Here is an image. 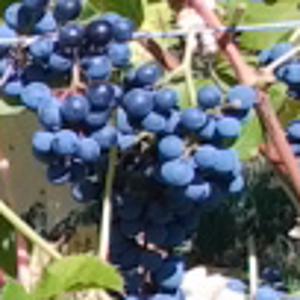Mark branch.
Wrapping results in <instances>:
<instances>
[{
	"label": "branch",
	"instance_id": "2",
	"mask_svg": "<svg viewBox=\"0 0 300 300\" xmlns=\"http://www.w3.org/2000/svg\"><path fill=\"white\" fill-rule=\"evenodd\" d=\"M189 5L203 17L207 28L222 24V20L215 14L207 0H189Z\"/></svg>",
	"mask_w": 300,
	"mask_h": 300
},
{
	"label": "branch",
	"instance_id": "1",
	"mask_svg": "<svg viewBox=\"0 0 300 300\" xmlns=\"http://www.w3.org/2000/svg\"><path fill=\"white\" fill-rule=\"evenodd\" d=\"M240 85H252L258 91L253 110L261 121L267 142L259 146V153L272 161L300 203V166L291 153L287 134L271 102L272 77L264 68L250 67L233 44L230 33L214 37Z\"/></svg>",
	"mask_w": 300,
	"mask_h": 300
}]
</instances>
